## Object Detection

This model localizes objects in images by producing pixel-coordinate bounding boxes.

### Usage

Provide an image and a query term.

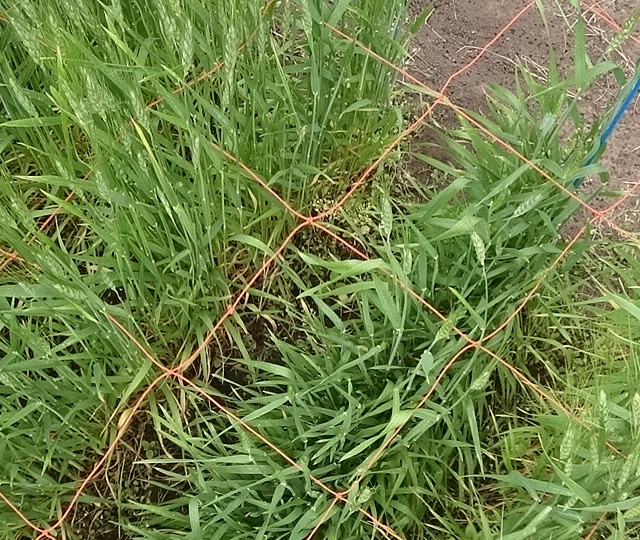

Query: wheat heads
[47,10,71,50]
[99,267,119,297]
[357,488,375,503]
[11,23,41,61]
[440,316,458,339]
[95,167,112,199]
[469,233,484,258]
[18,280,37,297]
[41,254,63,276]
[620,453,631,485]
[11,198,38,230]
[564,458,573,477]
[564,150,583,176]
[119,126,130,149]
[515,191,543,215]
[563,495,579,511]
[282,0,291,38]
[56,161,82,199]
[138,152,154,176]
[82,70,106,116]
[179,18,197,68]
[596,389,610,425]
[624,501,640,519]
[239,432,256,454]
[588,437,599,469]
[220,77,234,104]
[129,90,148,125]
[299,0,315,31]
[76,3,101,36]
[222,26,239,70]
[274,467,289,488]
[378,193,393,230]
[401,247,413,274]
[20,0,42,16]
[559,430,577,454]
[8,79,36,119]
[63,85,89,126]
[36,335,49,353]
[190,135,200,165]
[155,3,177,37]
[469,372,491,391]
[113,0,127,21]
[0,371,15,387]
[257,20,267,54]
[55,283,84,302]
